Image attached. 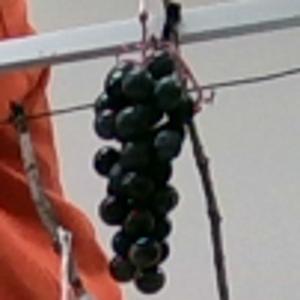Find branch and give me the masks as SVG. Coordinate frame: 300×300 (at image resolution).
Here are the masks:
<instances>
[{"mask_svg": "<svg viewBox=\"0 0 300 300\" xmlns=\"http://www.w3.org/2000/svg\"><path fill=\"white\" fill-rule=\"evenodd\" d=\"M9 109L16 135L22 150V167L29 185L30 196L38 212L45 234L57 256L64 260L68 284L77 300H98L97 294L84 279L73 253L64 238L63 227L44 192L41 171L31 134L30 119L26 106L16 98L9 100Z\"/></svg>", "mask_w": 300, "mask_h": 300, "instance_id": "branch-1", "label": "branch"}, {"mask_svg": "<svg viewBox=\"0 0 300 300\" xmlns=\"http://www.w3.org/2000/svg\"><path fill=\"white\" fill-rule=\"evenodd\" d=\"M183 126L190 142L191 156L195 162L201 191L204 196V216L210 223V245L215 275V290L220 300H230L229 285L226 277L228 269L221 230L224 217L220 206H218V197L210 170L211 158L205 154V148L199 136L196 114L193 120L183 124Z\"/></svg>", "mask_w": 300, "mask_h": 300, "instance_id": "branch-2", "label": "branch"}, {"mask_svg": "<svg viewBox=\"0 0 300 300\" xmlns=\"http://www.w3.org/2000/svg\"><path fill=\"white\" fill-rule=\"evenodd\" d=\"M163 12V20L160 26V46H166L171 49L178 59V65L175 70V77L183 82L188 92V80L185 76V70L182 62V13L183 7L181 0H159Z\"/></svg>", "mask_w": 300, "mask_h": 300, "instance_id": "branch-3", "label": "branch"}]
</instances>
